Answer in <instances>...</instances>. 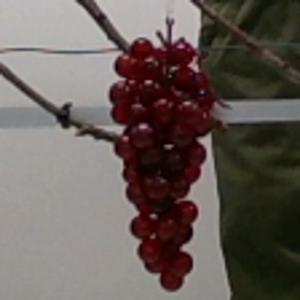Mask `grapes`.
Masks as SVG:
<instances>
[{
    "instance_id": "grapes-1",
    "label": "grapes",
    "mask_w": 300,
    "mask_h": 300,
    "mask_svg": "<svg viewBox=\"0 0 300 300\" xmlns=\"http://www.w3.org/2000/svg\"><path fill=\"white\" fill-rule=\"evenodd\" d=\"M194 57L185 40L168 49L135 39L113 62L116 75L126 80L108 90L111 120L124 127L113 151L123 160L126 199L138 212L128 231L140 241L143 268L159 275V286L168 293L181 290L194 267L183 245L192 239L199 209L187 197L208 158L198 138L214 128L209 114L216 103L214 82L188 66Z\"/></svg>"
}]
</instances>
